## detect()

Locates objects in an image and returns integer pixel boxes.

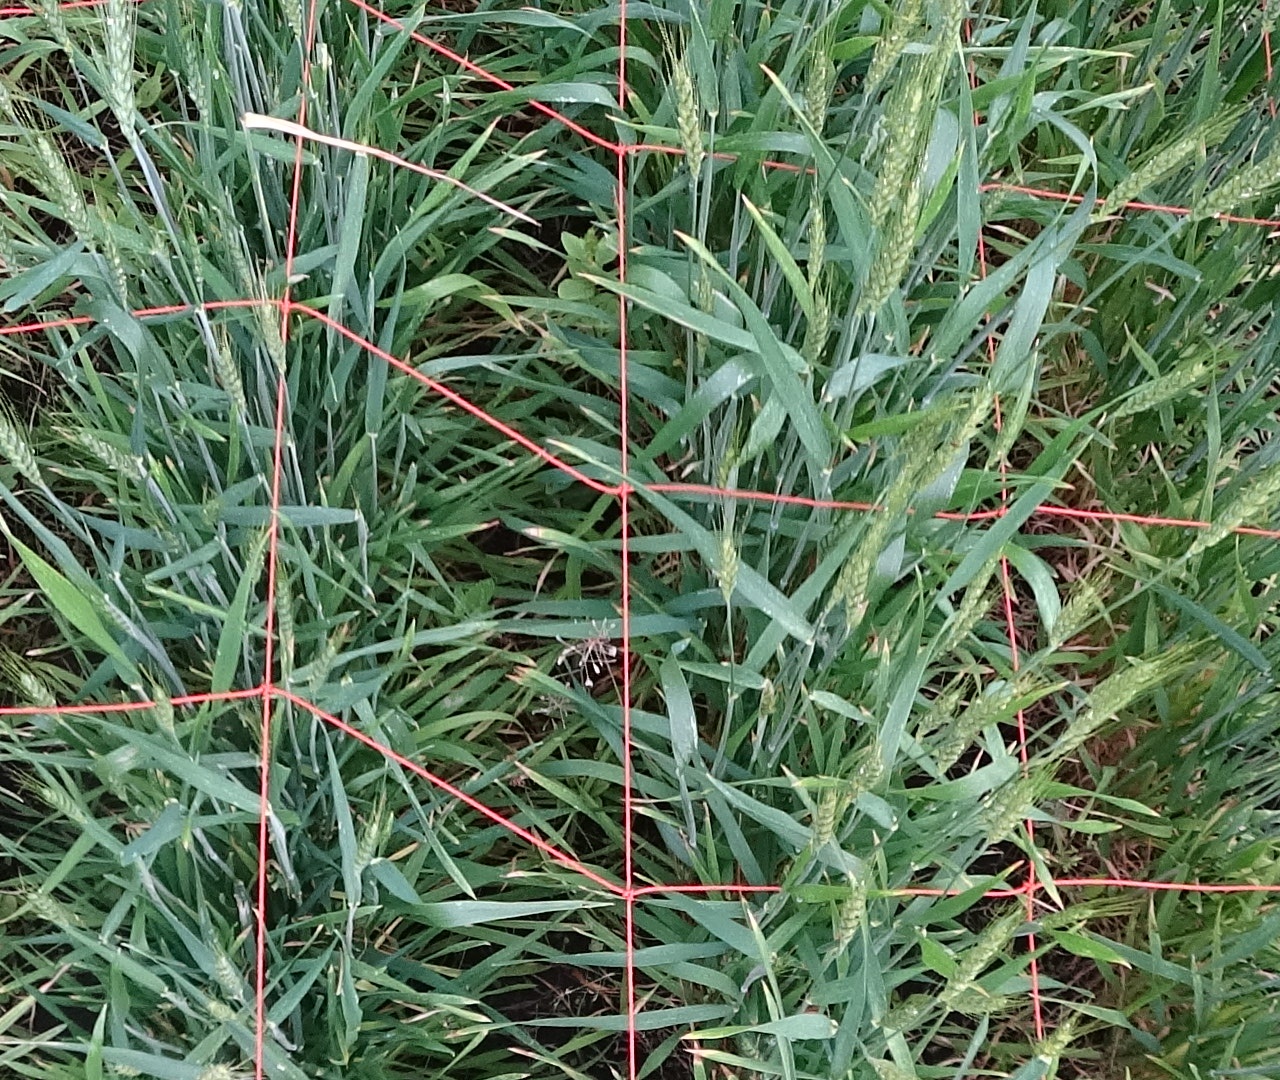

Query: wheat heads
[854,0,918,109]
[80,431,136,483]
[713,434,742,494]
[917,1,975,119]
[1116,364,1207,417]
[256,302,291,365]
[93,592,135,646]
[1107,136,1197,222]
[673,67,709,174]
[213,955,239,994]
[1036,903,1088,929]
[105,0,137,137]
[857,248,916,323]
[808,189,825,286]
[913,689,955,745]
[962,685,1022,733]
[874,1010,921,1033]
[758,677,780,722]
[183,223,209,285]
[872,182,930,316]
[1188,469,1280,553]
[806,791,835,855]
[831,879,868,953]
[199,1060,233,1080]
[734,1033,771,1066]
[827,502,896,600]
[315,637,338,687]
[0,427,42,490]
[938,605,989,662]
[26,884,71,932]
[47,785,91,821]
[228,225,264,293]
[0,221,23,280]
[719,533,739,591]
[282,0,312,42]
[38,0,69,68]
[865,1052,915,1080]
[103,233,131,311]
[874,84,925,215]
[852,754,885,793]
[274,578,294,658]
[34,147,85,240]
[149,677,178,736]
[25,671,59,711]
[215,346,241,410]
[997,779,1038,848]
[1040,585,1101,638]
[246,528,271,583]
[1184,159,1280,233]
[179,52,211,124]
[691,265,715,366]
[935,741,962,776]
[800,46,829,149]
[964,766,1034,831]
[798,294,835,363]
[355,818,380,870]
[113,1057,142,1080]
[165,528,181,556]
[920,383,994,483]
[1066,656,1153,739]
[1043,1019,1079,1070]
[963,546,1003,609]
[196,1000,235,1024]
[889,393,961,460]
[844,562,870,624]
[944,918,1010,1000]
